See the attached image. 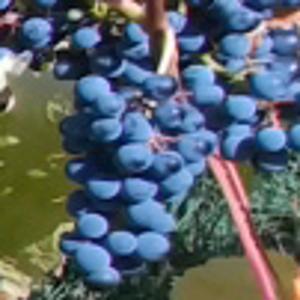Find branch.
Masks as SVG:
<instances>
[{"label":"branch","mask_w":300,"mask_h":300,"mask_svg":"<svg viewBox=\"0 0 300 300\" xmlns=\"http://www.w3.org/2000/svg\"><path fill=\"white\" fill-rule=\"evenodd\" d=\"M210 166L214 169V174L220 182L224 194L231 203L248 260L257 277L262 282L265 299L282 300V292L275 275V270L262 251L260 241L254 231L250 213L247 209L244 185L236 166L225 161L219 155L211 157Z\"/></svg>","instance_id":"obj_1"},{"label":"branch","mask_w":300,"mask_h":300,"mask_svg":"<svg viewBox=\"0 0 300 300\" xmlns=\"http://www.w3.org/2000/svg\"><path fill=\"white\" fill-rule=\"evenodd\" d=\"M149 13V24L156 35V46L154 56L161 58L164 55L167 43L168 17L166 14L164 0H146Z\"/></svg>","instance_id":"obj_2"}]
</instances>
